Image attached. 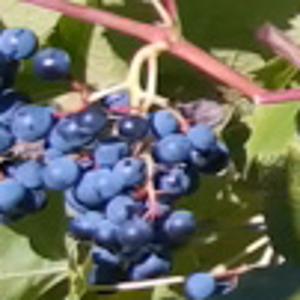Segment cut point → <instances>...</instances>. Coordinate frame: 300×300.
Segmentation results:
<instances>
[{
    "instance_id": "1",
    "label": "cut point",
    "mask_w": 300,
    "mask_h": 300,
    "mask_svg": "<svg viewBox=\"0 0 300 300\" xmlns=\"http://www.w3.org/2000/svg\"><path fill=\"white\" fill-rule=\"evenodd\" d=\"M165 53V49L154 44L142 45L131 61L130 69L123 84L112 87L111 89L100 90L88 98L90 103L108 96H113L123 91L130 89L131 104L139 103L140 98L155 104L165 107L167 99L157 94L159 83V59ZM147 58V75H146V90H140L139 78L143 63Z\"/></svg>"
}]
</instances>
